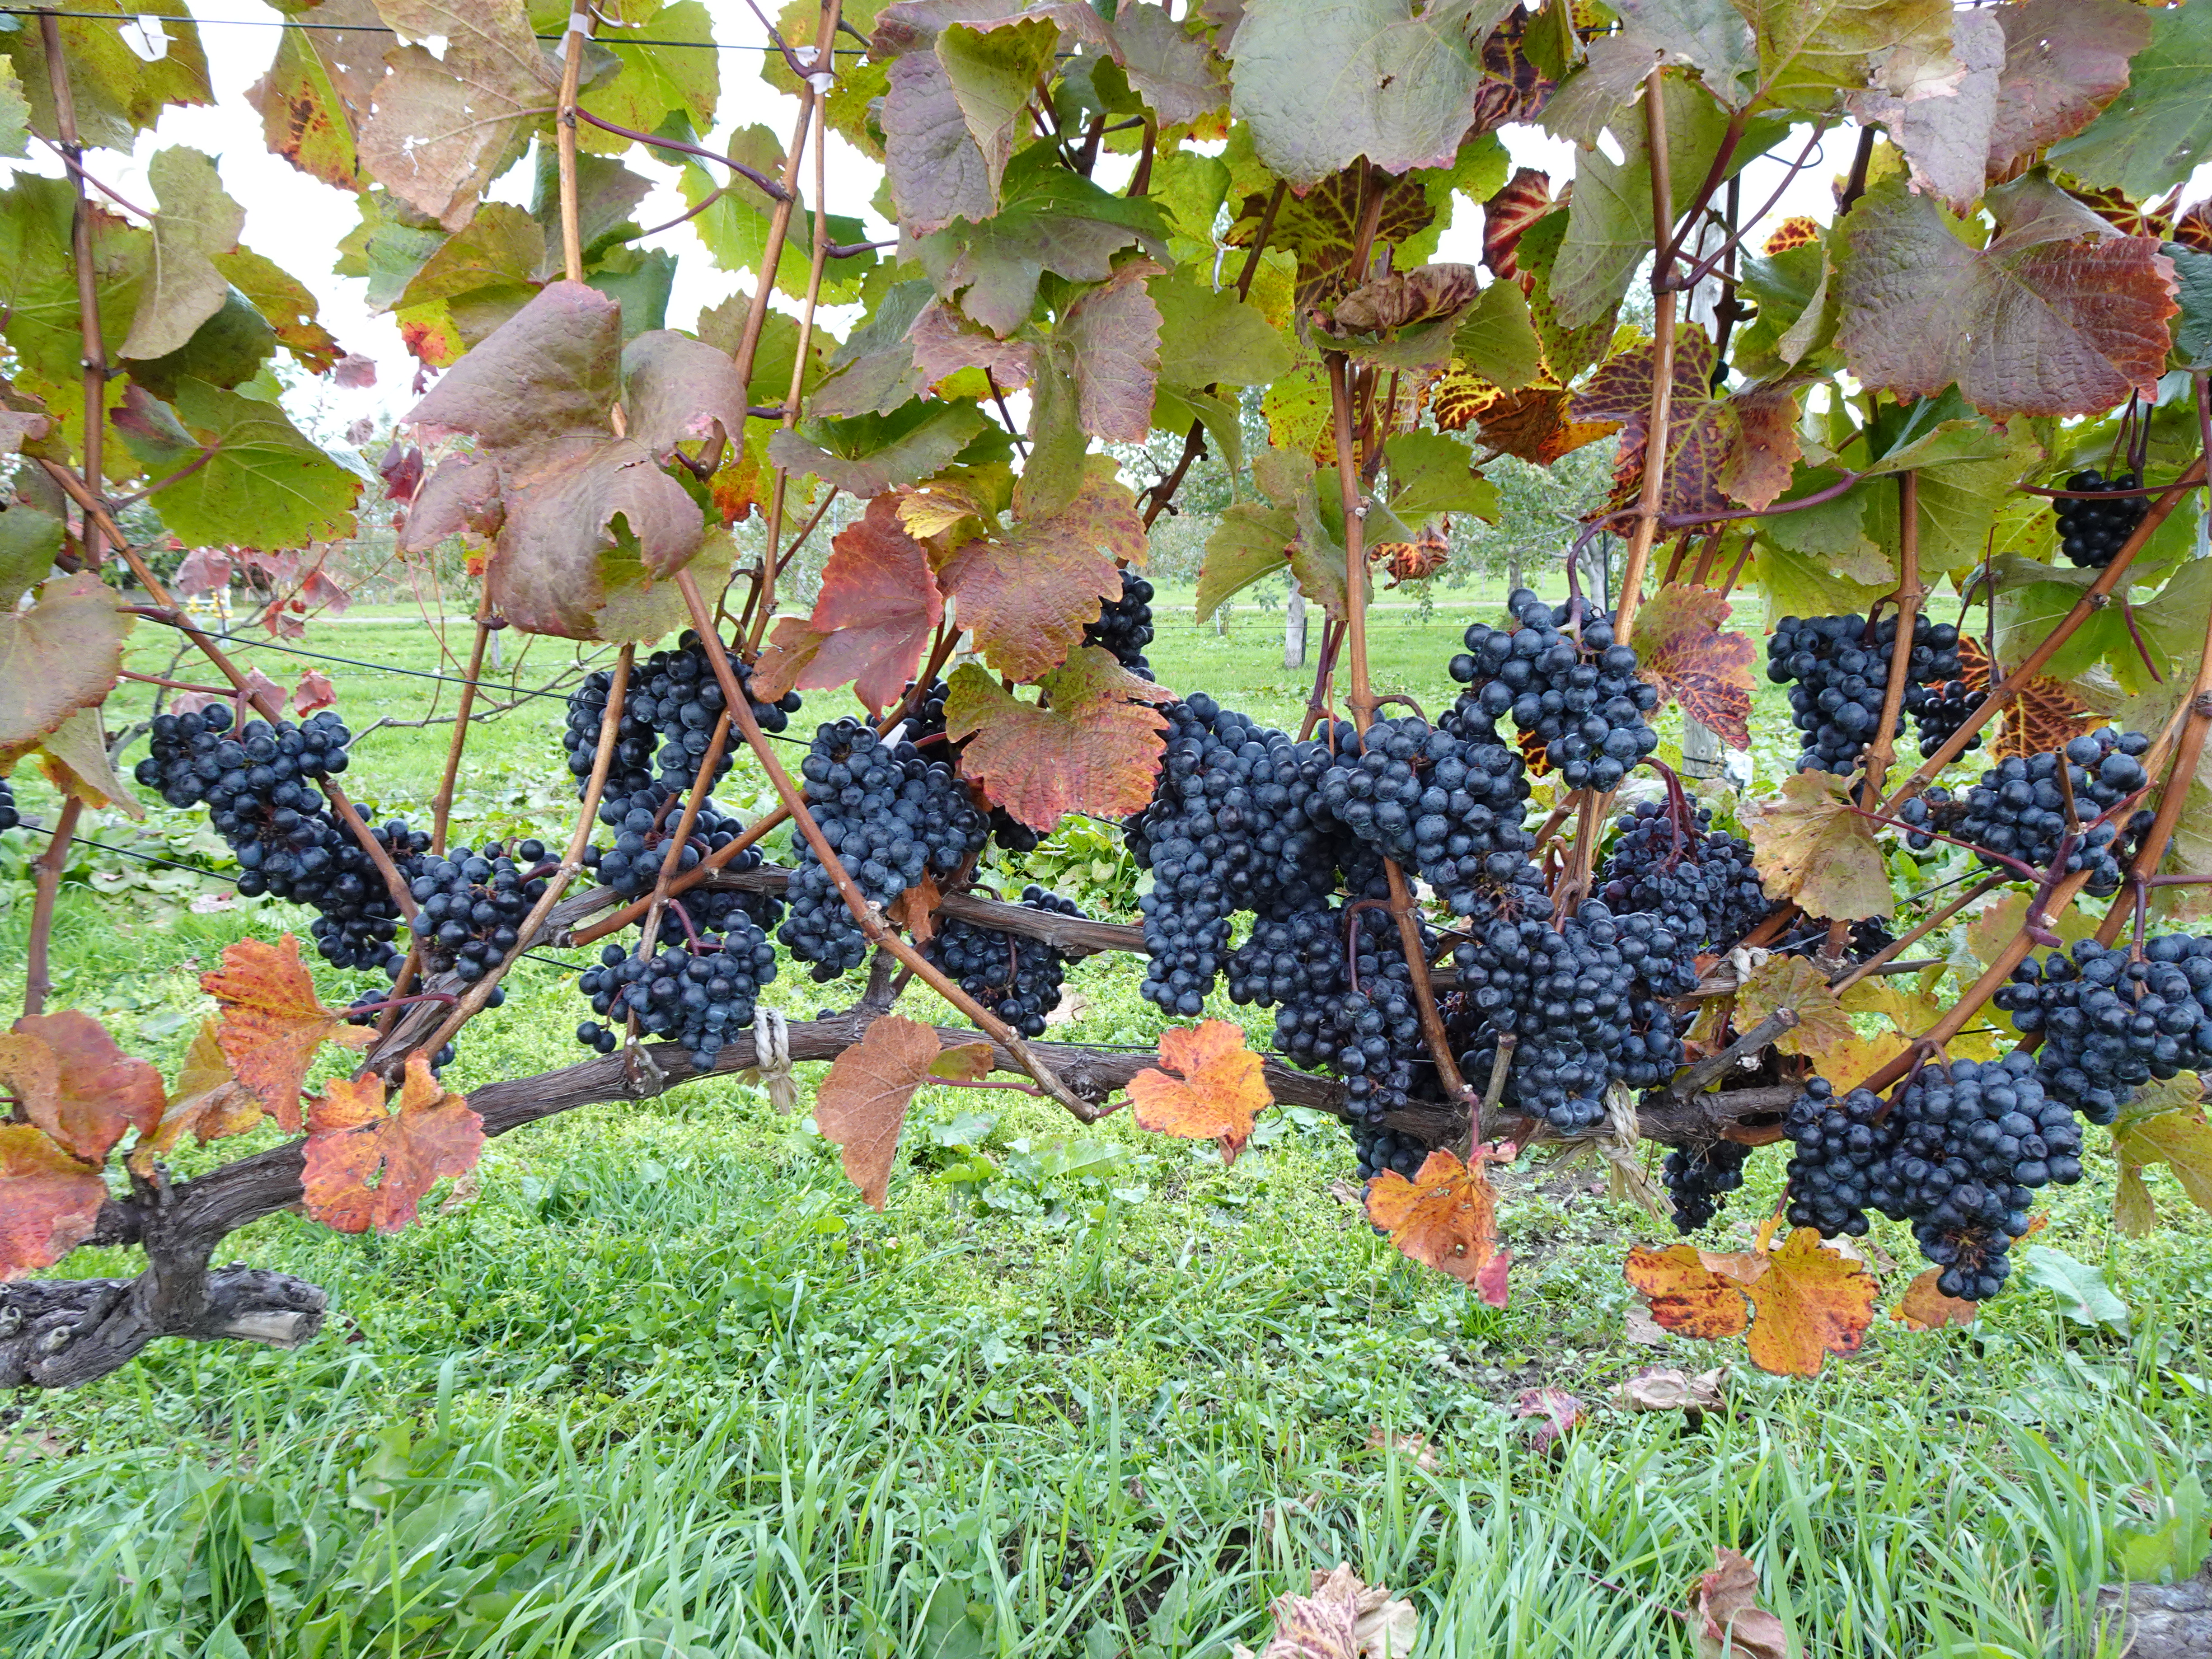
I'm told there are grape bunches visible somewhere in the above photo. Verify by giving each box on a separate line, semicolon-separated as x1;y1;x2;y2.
411;840;561;1014
1900;726;2177;897
1766;613;1962;786
632;628;802;797
135;702;350;904
0;777;20;834
1990;939;2203;1125
579;795;784;947
1119;699;1183;870
1884;1050;2081;1300
1081;571;1155;683
1250;831;1336;923
1158;691;1332;907
1332;820;1420;894
1661;1114;1753;1236
346;953;455;1086
2052;469;2156;571
1454;899;1676;1135
1339;1009;1487;1235
1464;589;1658;792
1305;718;1554;956
563;663;659;804
910;883;1104;1039
1438;623;1513;749
864;674;982;775
776;717;991;982
1334;955;1420;1125
1270;995;1351;1069
1906;681;1990;764
1459;1018;1522;1101
577;910;776;1074
1341;872;1436;970
1224;908;1349;1007
307;804;434;971
1139;808;1256;1015
986;803;1050;853
1597;789;1772;959
1785;1078;1902;1240
2146;934;2212;1069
